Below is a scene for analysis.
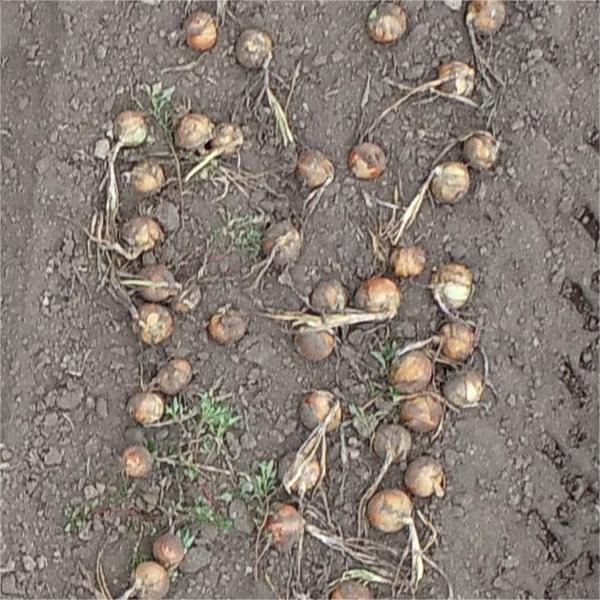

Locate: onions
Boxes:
[153,357,189,392]
[431,162,468,201]
[182,11,218,50]
[291,323,334,361]
[356,277,399,312]
[259,505,302,547]
[437,320,473,360]
[150,204,177,233]
[121,215,160,255]
[369,488,410,530]
[460,131,496,166]
[389,245,424,277]
[443,369,484,405]
[436,59,472,96]
[348,141,383,179]
[281,451,324,492]
[132,561,170,599]
[119,444,151,476]
[262,223,299,270]
[399,392,442,430]
[211,122,241,151]
[128,390,162,425]
[129,162,162,195]
[433,265,472,307]
[135,305,173,344]
[293,149,332,189]
[331,576,372,600]
[311,277,344,311]
[152,533,184,567]
[209,306,245,343]
[175,112,214,149]
[463,0,504,32]
[175,284,199,310]
[364,4,406,42]
[298,392,339,429]
[131,263,174,301]
[392,351,432,389]
[371,424,411,460]
[235,30,273,68]
[112,111,148,147]
[403,457,443,496]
